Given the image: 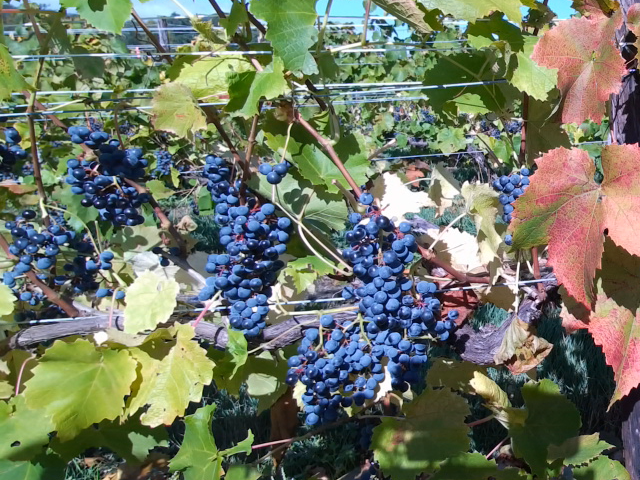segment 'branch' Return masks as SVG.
<instances>
[{"mask_svg": "<svg viewBox=\"0 0 640 480\" xmlns=\"http://www.w3.org/2000/svg\"><path fill=\"white\" fill-rule=\"evenodd\" d=\"M53 34H54V30L50 29L48 34L46 35V37L44 39L42 50H41V54H46L47 48H48V44H49Z\"/></svg>", "mask_w": 640, "mask_h": 480, "instance_id": "8bde2521", "label": "branch"}, {"mask_svg": "<svg viewBox=\"0 0 640 480\" xmlns=\"http://www.w3.org/2000/svg\"><path fill=\"white\" fill-rule=\"evenodd\" d=\"M359 307L358 306H352V307H338V308H327V309H317L316 312L314 309H311L310 311H305V310H290L289 314L290 315H299V314H313L318 316H324L325 314H329V313H340V312H345V311H358Z\"/></svg>", "mask_w": 640, "mask_h": 480, "instance_id": "1ff4a987", "label": "branch"}, {"mask_svg": "<svg viewBox=\"0 0 640 480\" xmlns=\"http://www.w3.org/2000/svg\"><path fill=\"white\" fill-rule=\"evenodd\" d=\"M36 94H37L36 90H33L31 92V97H30V100L28 101V105H27V112H32V107H33V104H34V102L36 100Z\"/></svg>", "mask_w": 640, "mask_h": 480, "instance_id": "a944a4c4", "label": "branch"}, {"mask_svg": "<svg viewBox=\"0 0 640 480\" xmlns=\"http://www.w3.org/2000/svg\"><path fill=\"white\" fill-rule=\"evenodd\" d=\"M28 130H29V143L31 147V155L33 159V168H34L38 189L40 192L39 199L41 204H45L47 202V198H46V194H45V190L43 187L42 179L40 176V170L38 166V156L36 153V144L34 141L33 117H28Z\"/></svg>", "mask_w": 640, "mask_h": 480, "instance_id": "982ccf7c", "label": "branch"}, {"mask_svg": "<svg viewBox=\"0 0 640 480\" xmlns=\"http://www.w3.org/2000/svg\"><path fill=\"white\" fill-rule=\"evenodd\" d=\"M201 110L203 111V113L209 118V120L211 121L212 124H214L217 129L221 132L224 141L227 143L230 152L233 154L234 158L238 161V163L240 164V166L243 169V175H242V180L246 181L251 180L252 179V175L249 169V162H250V158H251V152H252V146H253V141H254V134H255V129H256V125L258 123L259 120V116L255 115L253 117V121L251 123V127H250V131H249V139H248V144H247V149H246V156H245V160L243 161L242 157L238 154V152L236 151V149L234 148V145L232 143V141L229 138V135L227 133V131L225 130V128L219 123L218 120H216L214 118V116L212 115L211 112H209V110L206 107H201Z\"/></svg>", "mask_w": 640, "mask_h": 480, "instance_id": "325d2c04", "label": "branch"}, {"mask_svg": "<svg viewBox=\"0 0 640 480\" xmlns=\"http://www.w3.org/2000/svg\"><path fill=\"white\" fill-rule=\"evenodd\" d=\"M418 252L424 255L433 266H436L442 271L446 272L456 281L464 283H489L491 281V278L489 276H466L457 273L449 265H446L440 260L436 259L433 254L423 246H420L418 248Z\"/></svg>", "mask_w": 640, "mask_h": 480, "instance_id": "45aa463d", "label": "branch"}, {"mask_svg": "<svg viewBox=\"0 0 640 480\" xmlns=\"http://www.w3.org/2000/svg\"><path fill=\"white\" fill-rule=\"evenodd\" d=\"M131 15L134 17L137 24L146 33V35L155 43L159 51L161 53L165 52V48L163 47V45L160 43L158 38L150 31V29L144 24V22L142 21V19L140 18L139 14L136 12L135 9L131 10Z\"/></svg>", "mask_w": 640, "mask_h": 480, "instance_id": "ea751061", "label": "branch"}, {"mask_svg": "<svg viewBox=\"0 0 640 480\" xmlns=\"http://www.w3.org/2000/svg\"><path fill=\"white\" fill-rule=\"evenodd\" d=\"M8 246H9V243H8L7 238L3 234H0V247H1V249L5 252L6 256H8L9 258H13V255L8 250Z\"/></svg>", "mask_w": 640, "mask_h": 480, "instance_id": "2b1400db", "label": "branch"}, {"mask_svg": "<svg viewBox=\"0 0 640 480\" xmlns=\"http://www.w3.org/2000/svg\"><path fill=\"white\" fill-rule=\"evenodd\" d=\"M531 264L533 268L534 277L536 279L540 278L541 270H540L539 261H538V249L536 247H533L531 249Z\"/></svg>", "mask_w": 640, "mask_h": 480, "instance_id": "ca6c30ca", "label": "branch"}, {"mask_svg": "<svg viewBox=\"0 0 640 480\" xmlns=\"http://www.w3.org/2000/svg\"><path fill=\"white\" fill-rule=\"evenodd\" d=\"M282 104L286 107V109L291 113V115H295L296 116V122L302 127L304 128L307 132H310L315 139L322 145V147L327 151V153L329 154V156L331 157L332 161L335 163L336 167L338 168L339 172L341 173V175L344 177V179L346 180L348 186L350 187V189L356 194V195H360L362 193V190L355 184V181L353 180L352 176L350 175V173L347 171V169L345 168L343 162L340 160V158L338 157L337 153L334 151V149L329 145V143L325 140V138L321 135V133L314 128L312 125H309L300 115V113L294 108V106L291 104V102L287 99L284 98L282 100Z\"/></svg>", "mask_w": 640, "mask_h": 480, "instance_id": "30e6481e", "label": "branch"}, {"mask_svg": "<svg viewBox=\"0 0 640 480\" xmlns=\"http://www.w3.org/2000/svg\"><path fill=\"white\" fill-rule=\"evenodd\" d=\"M208 4L212 8V12L216 14L218 17H220L223 21H226L228 19V16L226 15V13L219 8L215 0H209Z\"/></svg>", "mask_w": 640, "mask_h": 480, "instance_id": "1af6ec82", "label": "branch"}, {"mask_svg": "<svg viewBox=\"0 0 640 480\" xmlns=\"http://www.w3.org/2000/svg\"><path fill=\"white\" fill-rule=\"evenodd\" d=\"M44 61H45V59H38L37 60V63H36V66H35V71H34V79H33V82H32V87L33 88H36L38 86L39 78H40V75H41V72H42V69H43V66H44Z\"/></svg>", "mask_w": 640, "mask_h": 480, "instance_id": "1d269e1b", "label": "branch"}, {"mask_svg": "<svg viewBox=\"0 0 640 480\" xmlns=\"http://www.w3.org/2000/svg\"><path fill=\"white\" fill-rule=\"evenodd\" d=\"M27 278L30 283L46 298L50 299L57 307L65 311L68 316H76L77 309L65 299H63L58 293L50 289L37 275L34 270L27 272Z\"/></svg>", "mask_w": 640, "mask_h": 480, "instance_id": "170604dd", "label": "branch"}]
</instances>
